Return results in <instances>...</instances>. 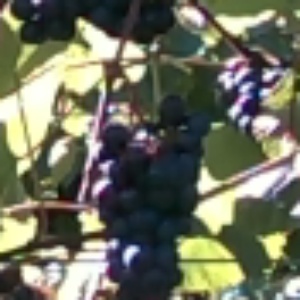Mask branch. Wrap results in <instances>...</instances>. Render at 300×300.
<instances>
[{"instance_id": "30e6481e", "label": "branch", "mask_w": 300, "mask_h": 300, "mask_svg": "<svg viewBox=\"0 0 300 300\" xmlns=\"http://www.w3.org/2000/svg\"><path fill=\"white\" fill-rule=\"evenodd\" d=\"M146 0H127L123 15V31L111 57L88 59L78 62H65V71H82L92 68L106 67L103 84L98 87V102L92 118V125L86 147L84 149V167L78 185L75 199H47L44 197L41 187L40 167L38 165V144L34 131L30 125L26 111L22 103V88H13V108L18 122L21 126L29 148V169L31 172L32 191L35 201L18 203L6 207L3 210L5 217H10L22 212L37 210L40 214V224L36 237L16 246L12 249L0 251V260H7L24 255L31 250L42 246L60 244L62 236L51 234L47 236L49 229V211H83L91 207V201L86 198L94 167V147L99 138L101 123L108 103V95L113 91L114 80L118 68L131 65H148V55H160L163 65H201V66H255L257 59L248 54L259 53L265 60L279 68L285 69L287 62L281 58L267 45L248 44L240 45L232 38L209 14L199 5V0H179L181 6H190V10L219 37L234 53L236 57H205V56H163L159 51H148L146 56H126L128 47L136 29L142 21L143 8Z\"/></svg>"}, {"instance_id": "325d2c04", "label": "branch", "mask_w": 300, "mask_h": 300, "mask_svg": "<svg viewBox=\"0 0 300 300\" xmlns=\"http://www.w3.org/2000/svg\"><path fill=\"white\" fill-rule=\"evenodd\" d=\"M300 163V153H295L292 156L285 157L276 163H271L267 166L257 167L249 171L241 172L240 174L234 175L217 187H214L208 191H204L200 194L202 201L212 200L218 196H222L227 192L234 191L241 187H244L256 180L263 179L266 176L275 174L276 172H282L297 166Z\"/></svg>"}]
</instances>
